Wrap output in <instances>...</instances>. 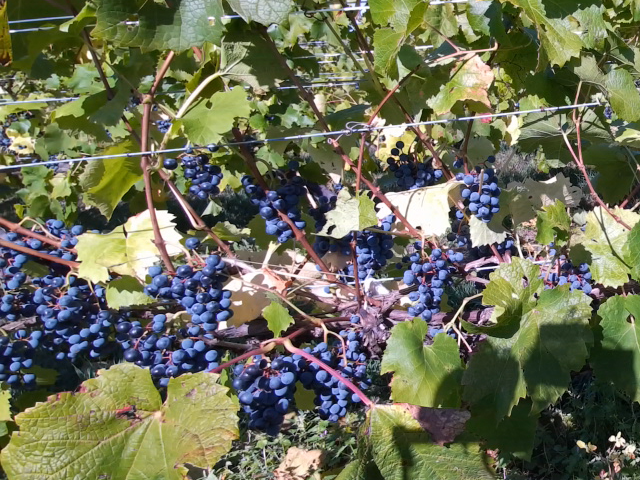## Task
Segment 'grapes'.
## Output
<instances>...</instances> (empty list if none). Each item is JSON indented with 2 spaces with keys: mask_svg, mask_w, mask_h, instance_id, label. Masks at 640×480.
<instances>
[{
  "mask_svg": "<svg viewBox=\"0 0 640 480\" xmlns=\"http://www.w3.org/2000/svg\"><path fill=\"white\" fill-rule=\"evenodd\" d=\"M420 254L413 252L410 257L404 256L401 262L395 265L397 270L403 267V264L411 262L407 266V270L403 272V282L407 286L416 284L419 291H412L407 294V299L417 302L413 306L407 308V313L411 317H418L426 323L432 320L433 314L441 311V296L444 294V286L446 283H453V273L456 271L454 266H447V262L443 259V251L440 248H433L430 251L429 260L419 262Z\"/></svg>",
  "mask_w": 640,
  "mask_h": 480,
  "instance_id": "grapes-3",
  "label": "grapes"
},
{
  "mask_svg": "<svg viewBox=\"0 0 640 480\" xmlns=\"http://www.w3.org/2000/svg\"><path fill=\"white\" fill-rule=\"evenodd\" d=\"M454 179L462 181L468 187L460 190V196L464 200H468V211L475 213L483 223H489L493 213L500 211L498 196L502 193V189L498 185V178L494 176V170L487 168L483 171L482 194L479 192L480 185L476 183V179L471 174L459 171L454 175Z\"/></svg>",
  "mask_w": 640,
  "mask_h": 480,
  "instance_id": "grapes-7",
  "label": "grapes"
},
{
  "mask_svg": "<svg viewBox=\"0 0 640 480\" xmlns=\"http://www.w3.org/2000/svg\"><path fill=\"white\" fill-rule=\"evenodd\" d=\"M0 254H9L13 257L11 266L7 265V260L4 257H0V270L4 272V277L2 278L3 288L5 290H16L27 279V274L20 272V269L29 262V257L25 253L7 247H0Z\"/></svg>",
  "mask_w": 640,
  "mask_h": 480,
  "instance_id": "grapes-13",
  "label": "grapes"
},
{
  "mask_svg": "<svg viewBox=\"0 0 640 480\" xmlns=\"http://www.w3.org/2000/svg\"><path fill=\"white\" fill-rule=\"evenodd\" d=\"M201 270H193L188 264L179 265L173 280L170 276L162 275L160 265H152L147 269L152 278L143 288V294L149 299L159 297L162 300L179 301L181 309L191 316V323L197 326L179 328L177 333L184 339L181 349H175L169 358L168 348L175 342L172 333L160 334L165 329L166 316L157 313L152 317L151 331L153 333L143 338V326L138 320H128L131 312L122 309L119 312H109L101 309L97 302L107 300L105 287L94 283L72 286L67 292L57 297L50 296L54 290L65 284L63 275L53 277L35 276L32 285L36 291L23 289L17 299V308L10 303L16 300L14 294L0 297V318L8 322H15L22 318L38 315L44 323L42 330H35L29 334L27 346L36 350L42 341V346L49 352L55 353L58 360L65 357L74 359L81 351L90 349L89 355L98 358L104 351L107 335L111 326L117 324L115 342L124 349L123 358L127 362H135L140 368H151L150 375L158 379L161 387L169 384L170 376H178L181 372L192 373L212 371L219 365L218 352L207 349L203 340L195 342L190 338L201 335L212 340L218 329V323L229 322L234 316L232 306V291L223 289L228 280L226 275L214 274L221 272L226 263L221 261L218 253H211L205 259Z\"/></svg>",
  "mask_w": 640,
  "mask_h": 480,
  "instance_id": "grapes-1",
  "label": "grapes"
},
{
  "mask_svg": "<svg viewBox=\"0 0 640 480\" xmlns=\"http://www.w3.org/2000/svg\"><path fill=\"white\" fill-rule=\"evenodd\" d=\"M387 163L394 175L400 178L397 185L406 190H414L426 184L433 185L442 180L443 173L438 168L431 169L429 163L420 162L418 165H414L412 161H409L407 165L399 166L392 157L387 159Z\"/></svg>",
  "mask_w": 640,
  "mask_h": 480,
  "instance_id": "grapes-10",
  "label": "grapes"
},
{
  "mask_svg": "<svg viewBox=\"0 0 640 480\" xmlns=\"http://www.w3.org/2000/svg\"><path fill=\"white\" fill-rule=\"evenodd\" d=\"M14 344L7 336L0 337V381H5L8 385H14L18 380L16 374L21 368H30L34 360L24 358L22 354L12 353Z\"/></svg>",
  "mask_w": 640,
  "mask_h": 480,
  "instance_id": "grapes-12",
  "label": "grapes"
},
{
  "mask_svg": "<svg viewBox=\"0 0 640 480\" xmlns=\"http://www.w3.org/2000/svg\"><path fill=\"white\" fill-rule=\"evenodd\" d=\"M241 184L244 191L253 194L249 198L252 206H258V217L265 222V233L270 237L277 236L280 244H285L294 237V231L290 228L286 221L276 215V210L281 209L286 213L299 229L306 227V221L300 219V213L295 205L299 202L298 196L305 194L303 180L300 177H292L287 186H283L279 190H270L265 195L260 185H254L253 177L250 174H244L241 177Z\"/></svg>",
  "mask_w": 640,
  "mask_h": 480,
  "instance_id": "grapes-4",
  "label": "grapes"
},
{
  "mask_svg": "<svg viewBox=\"0 0 640 480\" xmlns=\"http://www.w3.org/2000/svg\"><path fill=\"white\" fill-rule=\"evenodd\" d=\"M448 217L452 219V231L454 233H457L460 229V234L458 235L457 239V236L455 234L449 232L446 235V239L450 242L456 240V245L459 248H463L467 244L468 238L470 237L469 226L467 224H463L460 227V222L464 218V214L458 209L456 205H453L451 207V211L448 213Z\"/></svg>",
  "mask_w": 640,
  "mask_h": 480,
  "instance_id": "grapes-14",
  "label": "grapes"
},
{
  "mask_svg": "<svg viewBox=\"0 0 640 480\" xmlns=\"http://www.w3.org/2000/svg\"><path fill=\"white\" fill-rule=\"evenodd\" d=\"M561 275L559 273L541 272L539 277L541 279H547L549 282H557L559 285H565L567 282L571 284L568 286L570 291L577 290L583 291L586 294L592 292V285L589 283L592 273L589 271V265L587 263H580L578 268L573 263H564L561 266Z\"/></svg>",
  "mask_w": 640,
  "mask_h": 480,
  "instance_id": "grapes-11",
  "label": "grapes"
},
{
  "mask_svg": "<svg viewBox=\"0 0 640 480\" xmlns=\"http://www.w3.org/2000/svg\"><path fill=\"white\" fill-rule=\"evenodd\" d=\"M339 335L346 337L348 346L346 348V358L349 361H345L343 357L338 359L332 355V352L328 350L329 345L326 342H319L312 348L304 346L302 351L312 358H320V360L329 365L335 371H339L338 375L343 377L347 381H351L354 377L359 383L361 390H367L374 385V380L367 376V365L363 363L366 360V354L364 352H357L356 349L360 346V338L364 336L363 332L357 333L351 330H340Z\"/></svg>",
  "mask_w": 640,
  "mask_h": 480,
  "instance_id": "grapes-6",
  "label": "grapes"
},
{
  "mask_svg": "<svg viewBox=\"0 0 640 480\" xmlns=\"http://www.w3.org/2000/svg\"><path fill=\"white\" fill-rule=\"evenodd\" d=\"M209 158L205 154H199L197 157L183 156L182 164L187 168L182 170V176L185 179H191V186L188 192L197 195L202 200L209 198L208 191L218 196L220 188L218 185L223 179V173L218 165H211Z\"/></svg>",
  "mask_w": 640,
  "mask_h": 480,
  "instance_id": "grapes-9",
  "label": "grapes"
},
{
  "mask_svg": "<svg viewBox=\"0 0 640 480\" xmlns=\"http://www.w3.org/2000/svg\"><path fill=\"white\" fill-rule=\"evenodd\" d=\"M313 245L314 251L324 257L326 252H340L343 256H349L352 245L356 251L358 278L365 280L372 277L381 267L394 256L391 248L394 241L390 234H382L373 231L351 232L344 239H339L330 245L328 237L317 236Z\"/></svg>",
  "mask_w": 640,
  "mask_h": 480,
  "instance_id": "grapes-5",
  "label": "grapes"
},
{
  "mask_svg": "<svg viewBox=\"0 0 640 480\" xmlns=\"http://www.w3.org/2000/svg\"><path fill=\"white\" fill-rule=\"evenodd\" d=\"M252 363L254 365L249 367L236 364L233 373L237 377L232 381V387L241 390L238 401L243 412L249 415L247 428L250 431H265L268 436H276L281 431L298 380L305 389L315 391L313 412L319 414L322 421L336 423L346 415L349 403L361 402V398L336 376L297 353L276 355L270 368L277 369L280 374L268 378L263 376L262 369L268 366V360L262 354L255 355Z\"/></svg>",
  "mask_w": 640,
  "mask_h": 480,
  "instance_id": "grapes-2",
  "label": "grapes"
},
{
  "mask_svg": "<svg viewBox=\"0 0 640 480\" xmlns=\"http://www.w3.org/2000/svg\"><path fill=\"white\" fill-rule=\"evenodd\" d=\"M45 227L48 228L50 234L61 240L62 248L53 250L39 249L42 245V242L40 240L34 238H18L19 234L17 232H7L4 227H0V238L15 245H23L24 247L29 246L31 249L38 250V252L43 254L66 259L69 261H74V253L63 248H67L69 245L78 244V238L74 236H80L83 232L84 226L73 225L65 230L63 229L64 222L62 220L50 218L45 220Z\"/></svg>",
  "mask_w": 640,
  "mask_h": 480,
  "instance_id": "grapes-8",
  "label": "grapes"
},
{
  "mask_svg": "<svg viewBox=\"0 0 640 480\" xmlns=\"http://www.w3.org/2000/svg\"><path fill=\"white\" fill-rule=\"evenodd\" d=\"M338 198L336 196H332L330 200L326 196H321L319 198V202L321 207L316 209H310L308 214L314 218L316 223L314 227L317 231H321L326 225V218L324 217L325 212H330L336 205Z\"/></svg>",
  "mask_w": 640,
  "mask_h": 480,
  "instance_id": "grapes-15",
  "label": "grapes"
}]
</instances>
